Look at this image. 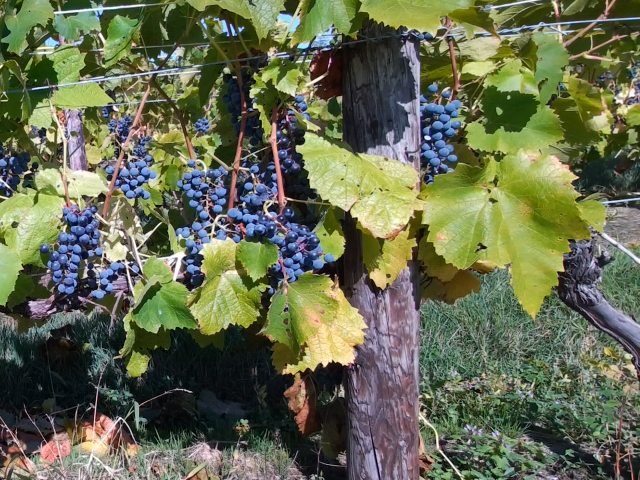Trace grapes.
<instances>
[{
    "instance_id": "01657485",
    "label": "grapes",
    "mask_w": 640,
    "mask_h": 480,
    "mask_svg": "<svg viewBox=\"0 0 640 480\" xmlns=\"http://www.w3.org/2000/svg\"><path fill=\"white\" fill-rule=\"evenodd\" d=\"M269 215L279 224H284L287 230L291 229L286 238L276 236L279 232L278 224L263 214L261 210L254 213H251L248 207L242 209L233 207L227 210V217L246 224L245 235L248 238H254L256 235L264 236L269 238L273 244L281 247L278 251V257L283 260L284 268L280 263H274L271 271L273 273L284 271L288 277L286 279L288 284L296 283L298 276L308 270H321L324 263L320 260V255L324 253V250L320 246V239L316 233H312L309 226L289 222V219L296 215L295 209L285 208L282 216L275 210H271Z\"/></svg>"
},
{
    "instance_id": "b958b902",
    "label": "grapes",
    "mask_w": 640,
    "mask_h": 480,
    "mask_svg": "<svg viewBox=\"0 0 640 480\" xmlns=\"http://www.w3.org/2000/svg\"><path fill=\"white\" fill-rule=\"evenodd\" d=\"M97 212V207L94 204H89L82 210V214H77V207L75 205L65 206L62 210V218L66 223H69L71 232L60 233L57 240L61 243H69L68 245H60L57 251H50L47 244H43L39 248L41 254H47L49 260L46 262V268L52 270V282L57 285L58 292L61 294L70 295L74 293L75 288L78 286L76 278L78 277L79 264L82 259L88 257H101L103 250L101 248H93L92 250L84 251L82 245H92L97 247L99 245V238L101 233L98 230V224L100 221L97 218H93Z\"/></svg>"
},
{
    "instance_id": "0513c4c2",
    "label": "grapes",
    "mask_w": 640,
    "mask_h": 480,
    "mask_svg": "<svg viewBox=\"0 0 640 480\" xmlns=\"http://www.w3.org/2000/svg\"><path fill=\"white\" fill-rule=\"evenodd\" d=\"M418 99L422 104L419 109L422 120L431 118L433 113L439 115V121L434 120L431 124H426L421 128L423 135L431 136L435 141L434 147L431 143H424L422 145V158L425 161H429L431 165V168L424 173V183L431 185L434 182V173L439 174L440 172L455 171L454 167H449L447 164L442 163L446 159L449 163H456L459 160L457 154H451L455 151V146L451 143H446L443 138L446 136L448 139H452L456 134V130L462 127L460 120H451L460 115L458 110L462 108V102L452 99L450 103L445 105L428 103L430 97L427 93L420 94Z\"/></svg>"
},
{
    "instance_id": "84f90ec7",
    "label": "grapes",
    "mask_w": 640,
    "mask_h": 480,
    "mask_svg": "<svg viewBox=\"0 0 640 480\" xmlns=\"http://www.w3.org/2000/svg\"><path fill=\"white\" fill-rule=\"evenodd\" d=\"M187 166L190 169H194L192 171H186L184 173V179L188 182H183L179 180L177 182V187L182 189L185 192V196L190 199L188 202V206L190 208L196 209L199 212V217L203 220L200 222H194L191 225V229L193 231H198L197 236L200 238V242L196 243L193 239H186L184 241V246L187 248V252L194 256H188L186 258L187 265L185 266V270L189 275H192L189 279V282L192 285H200L203 282V278L205 274L200 271V267L202 266V261L204 260V256L202 254H197L204 249L203 244H209L211 242V238L207 236L206 227L211 225V222L207 220L209 218V213L205 208L203 203H200L197 199L203 196V191H206L209 188L207 183H202L201 178H215L219 179L221 176H227L229 171L225 169L223 166H220L218 169L209 168L207 171L195 169L197 167L196 161L194 159H189L187 161Z\"/></svg>"
},
{
    "instance_id": "f8a65327",
    "label": "grapes",
    "mask_w": 640,
    "mask_h": 480,
    "mask_svg": "<svg viewBox=\"0 0 640 480\" xmlns=\"http://www.w3.org/2000/svg\"><path fill=\"white\" fill-rule=\"evenodd\" d=\"M250 156L240 161L241 167H250V171L257 175V179L261 182L256 186L251 182H246L243 186V190L240 194V200L243 203H249L255 207H261L264 204V200H267L271 195H275L278 192V183L275 170V162L269 160L268 162H262L258 165H254Z\"/></svg>"
},
{
    "instance_id": "5460f4e3",
    "label": "grapes",
    "mask_w": 640,
    "mask_h": 480,
    "mask_svg": "<svg viewBox=\"0 0 640 480\" xmlns=\"http://www.w3.org/2000/svg\"><path fill=\"white\" fill-rule=\"evenodd\" d=\"M153 156L151 154L145 155L143 160L129 162L127 168H122L119 171V176L115 186L119 187L123 191V195L127 199H139L140 197L147 200L151 197V193L141 186L143 183H147L150 179H155L157 173L147 167V162H151Z\"/></svg>"
},
{
    "instance_id": "83cd7487",
    "label": "grapes",
    "mask_w": 640,
    "mask_h": 480,
    "mask_svg": "<svg viewBox=\"0 0 640 480\" xmlns=\"http://www.w3.org/2000/svg\"><path fill=\"white\" fill-rule=\"evenodd\" d=\"M289 157L290 154L285 149L279 151L281 173L285 178L284 195L289 199L298 201H305L307 198L315 200L317 195L308 188V179L306 177H297L304 168L302 155L296 153L291 158Z\"/></svg>"
},
{
    "instance_id": "e5b3c951",
    "label": "grapes",
    "mask_w": 640,
    "mask_h": 480,
    "mask_svg": "<svg viewBox=\"0 0 640 480\" xmlns=\"http://www.w3.org/2000/svg\"><path fill=\"white\" fill-rule=\"evenodd\" d=\"M31 160V155L29 153L18 154L17 156H11L9 159L5 158V146L0 144V168L8 167L10 171L14 173L11 177H6L3 181H0V189L3 190L4 194L7 197L12 195V191L6 187L5 183L8 184L11 188L16 189L18 184L21 182L20 174L25 172L28 169V162ZM8 174V170L3 168L0 170L1 176H6Z\"/></svg>"
},
{
    "instance_id": "2adb6a1f",
    "label": "grapes",
    "mask_w": 640,
    "mask_h": 480,
    "mask_svg": "<svg viewBox=\"0 0 640 480\" xmlns=\"http://www.w3.org/2000/svg\"><path fill=\"white\" fill-rule=\"evenodd\" d=\"M236 76V72L232 71L229 74L223 75V82L229 83L227 87V94L221 97V101L223 103H232L227 105V112L232 115L230 118V122L234 125V131L239 132L240 129V121H238L237 117L241 116V106H240V98L238 95V87H237V79L233 78Z\"/></svg>"
},
{
    "instance_id": "ef6de9ee",
    "label": "grapes",
    "mask_w": 640,
    "mask_h": 480,
    "mask_svg": "<svg viewBox=\"0 0 640 480\" xmlns=\"http://www.w3.org/2000/svg\"><path fill=\"white\" fill-rule=\"evenodd\" d=\"M125 265L122 262H112L108 265L106 270H102L98 275L100 276V284L102 285L101 289L92 290L91 295L96 299H103L106 296V293L111 292L114 287L111 284V278L115 275V272L119 270H123Z\"/></svg>"
},
{
    "instance_id": "1ff8f66d",
    "label": "grapes",
    "mask_w": 640,
    "mask_h": 480,
    "mask_svg": "<svg viewBox=\"0 0 640 480\" xmlns=\"http://www.w3.org/2000/svg\"><path fill=\"white\" fill-rule=\"evenodd\" d=\"M261 116L260 112H257L255 115L249 117L245 121V137H251L249 140V144L252 146H256L263 138V131L259 127L261 125V121L259 120Z\"/></svg>"
},
{
    "instance_id": "54f908b8",
    "label": "grapes",
    "mask_w": 640,
    "mask_h": 480,
    "mask_svg": "<svg viewBox=\"0 0 640 480\" xmlns=\"http://www.w3.org/2000/svg\"><path fill=\"white\" fill-rule=\"evenodd\" d=\"M241 72H242V84H243V92H244L245 101H246L247 114H252L255 111V108L253 107V103L258 101V97L254 96L253 98L250 99L249 91L252 90L251 85L256 84V79L251 78V74L247 73L246 68H242Z\"/></svg>"
},
{
    "instance_id": "91a60905",
    "label": "grapes",
    "mask_w": 640,
    "mask_h": 480,
    "mask_svg": "<svg viewBox=\"0 0 640 480\" xmlns=\"http://www.w3.org/2000/svg\"><path fill=\"white\" fill-rule=\"evenodd\" d=\"M229 193V189L226 186L219 187L210 193V199L215 205L211 207L214 213H222L224 208L222 206L228 203V199L224 197Z\"/></svg>"
},
{
    "instance_id": "dcf779d0",
    "label": "grapes",
    "mask_w": 640,
    "mask_h": 480,
    "mask_svg": "<svg viewBox=\"0 0 640 480\" xmlns=\"http://www.w3.org/2000/svg\"><path fill=\"white\" fill-rule=\"evenodd\" d=\"M298 119L297 118H292L288 120V124H287V120L285 118H281L276 126L277 128V138L276 140L278 141V144L280 146H288L290 144V138L285 135V131L287 130L289 127H292L293 124L297 123Z\"/></svg>"
},
{
    "instance_id": "802abce8",
    "label": "grapes",
    "mask_w": 640,
    "mask_h": 480,
    "mask_svg": "<svg viewBox=\"0 0 640 480\" xmlns=\"http://www.w3.org/2000/svg\"><path fill=\"white\" fill-rule=\"evenodd\" d=\"M86 267L89 269V270L86 272V275H87L88 277H90V278L88 279V281H87V284H88V285H94V284H95V276H96V273H95V271L93 270V268H94V264H93L92 262H88V263L86 264Z\"/></svg>"
}]
</instances>
